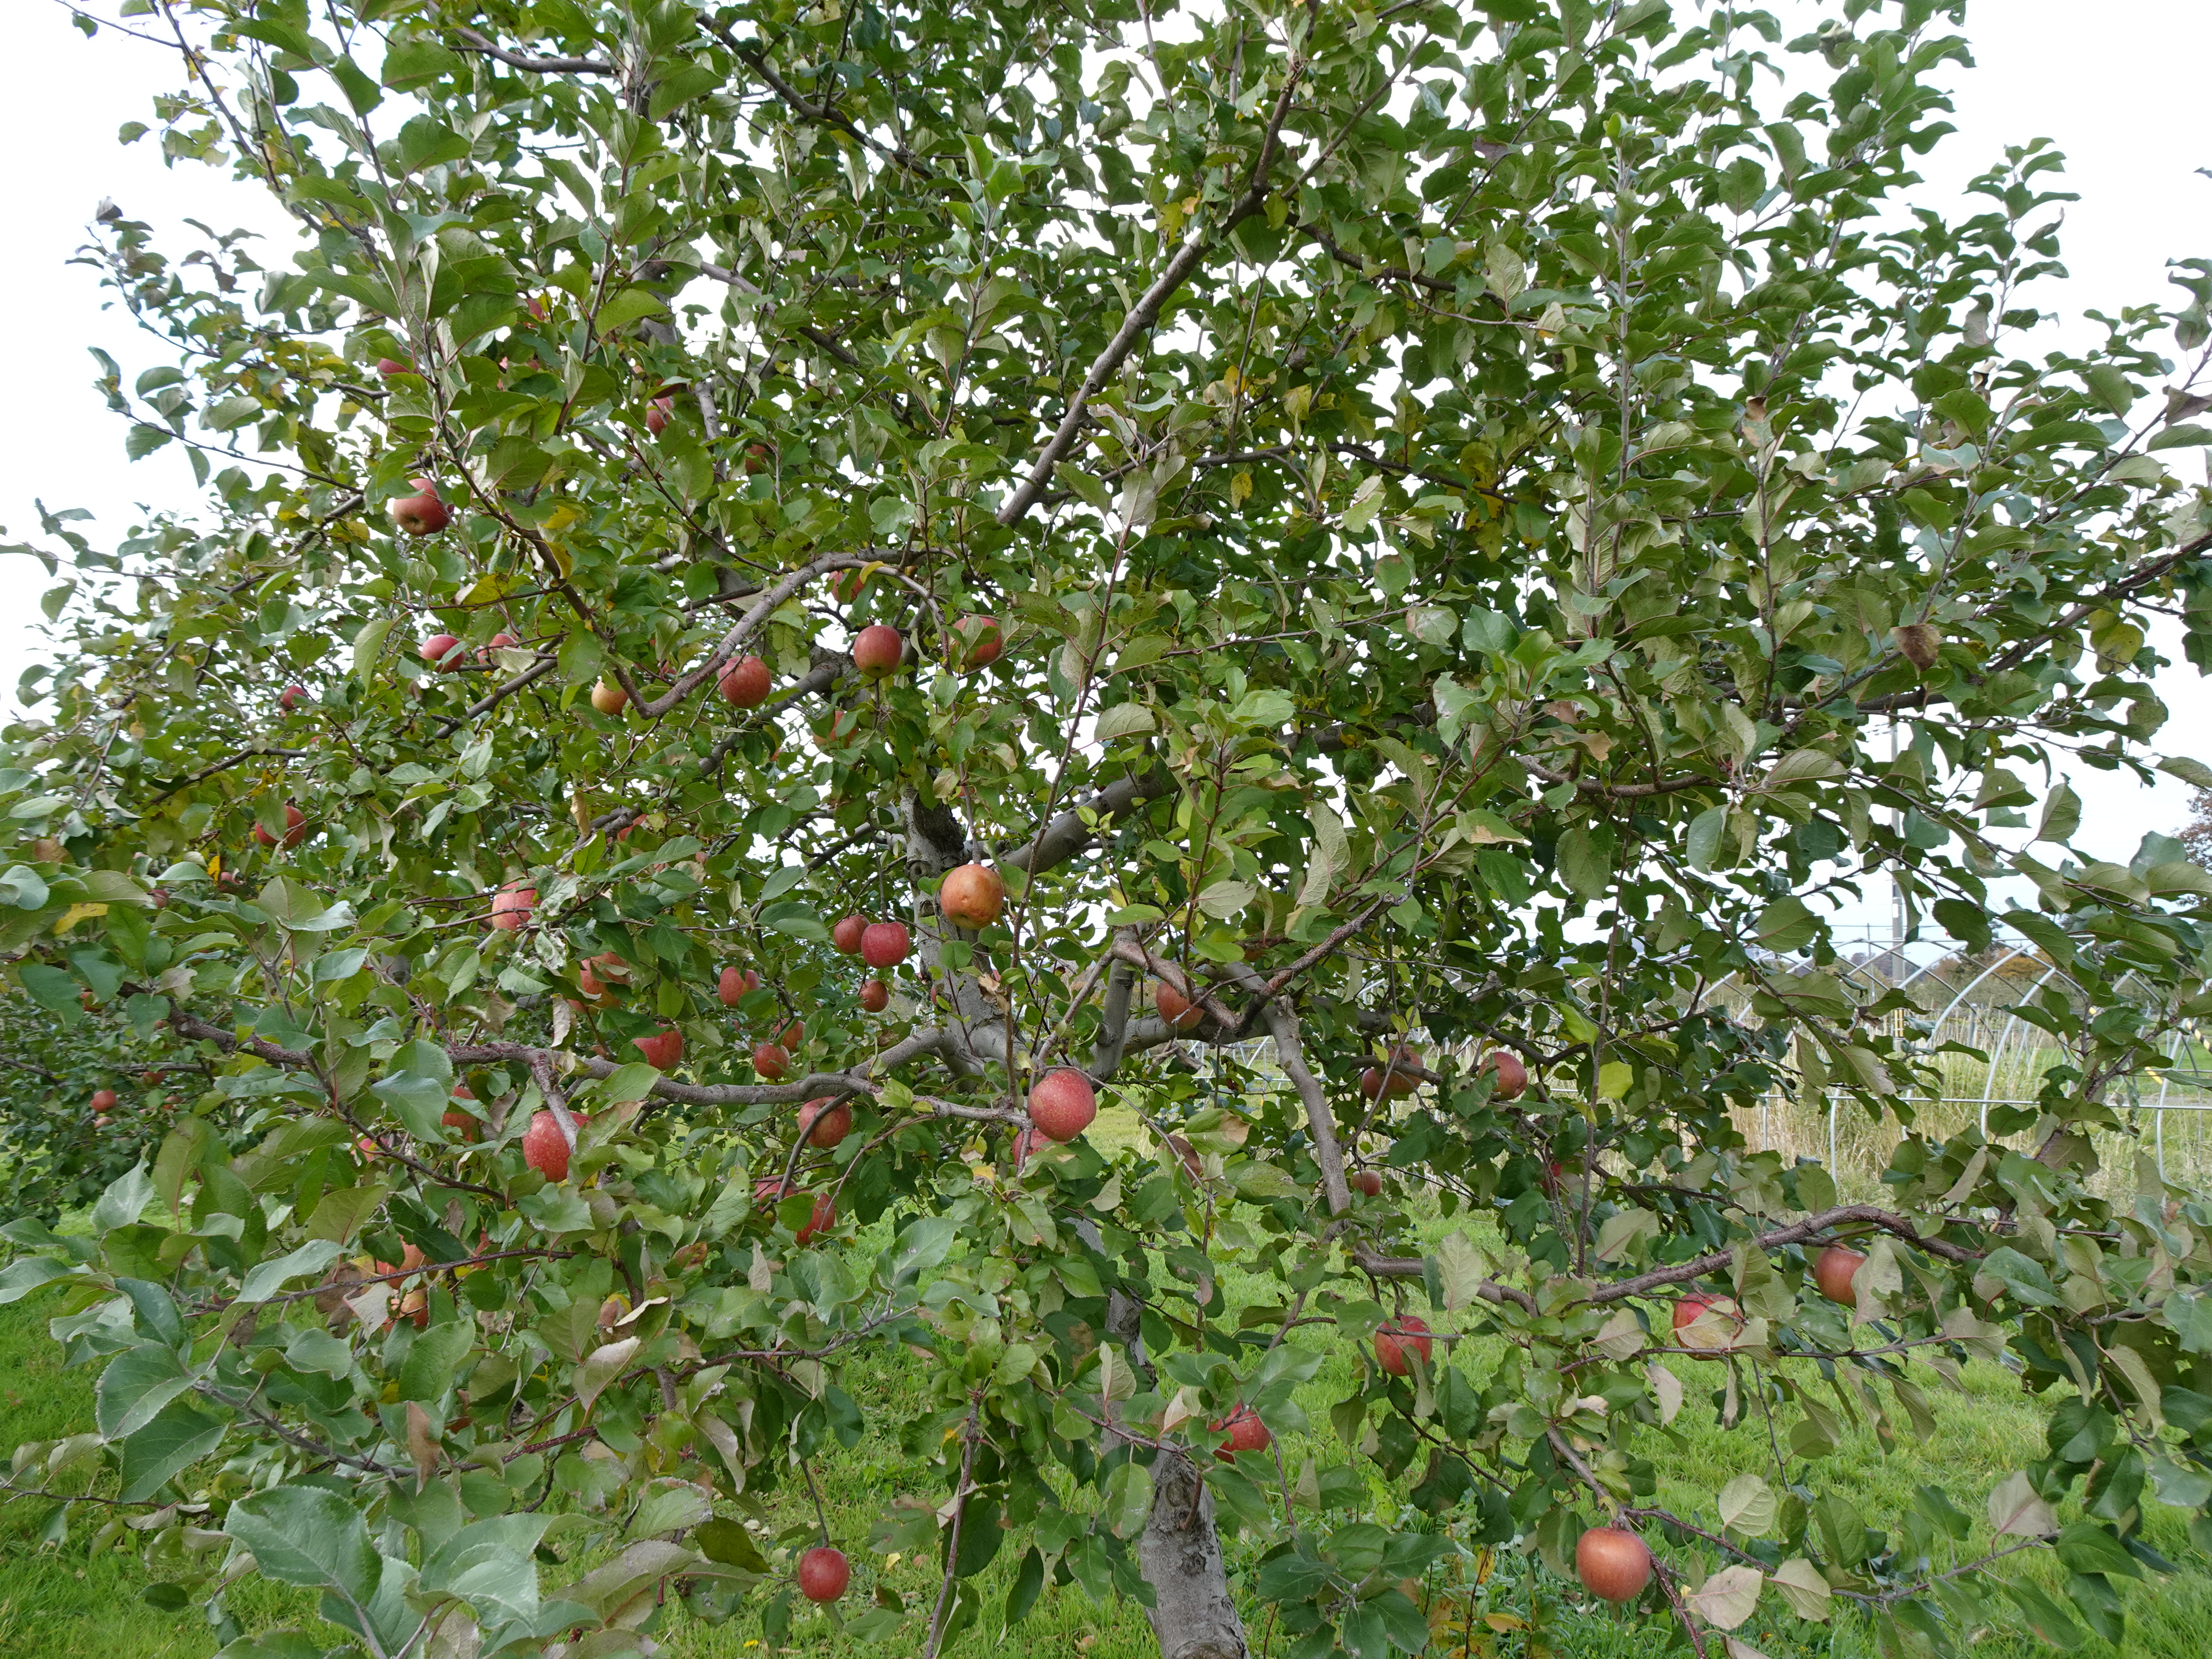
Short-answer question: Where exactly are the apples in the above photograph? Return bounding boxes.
[1349,1169,1383,1199]
[743,435,785,481]
[719,655,771,710]
[1190,774,1227,812]
[1204,1393,1274,1466]
[76,988,105,1013]
[798,1546,849,1602]
[280,702,302,721]
[219,993,248,1022]
[853,978,890,1012]
[253,804,307,850]
[833,914,874,956]
[430,1009,460,1034]
[781,1191,836,1246]
[214,1272,258,1315]
[1014,1127,1067,1175]
[912,965,939,986]
[148,887,171,909]
[632,359,682,402]
[943,616,1004,674]
[1797,1233,1844,1278]
[92,1115,115,1140]
[761,748,790,772]
[635,637,673,673]
[1362,1062,1400,1105]
[477,630,519,673]
[977,970,1016,1003]
[391,477,454,537]
[660,665,686,692]
[503,297,550,339]
[867,1033,903,1061]
[769,1019,808,1056]
[346,1136,394,1180]
[437,1391,481,1433]
[951,782,982,808]
[796,1095,853,1150]
[423,1086,478,1144]
[677,1242,726,1295]
[464,1229,527,1277]
[861,920,910,969]
[1076,1633,1107,1653]
[747,1172,800,1225]
[422,632,465,673]
[212,870,243,895]
[1374,1314,1434,1375]
[524,1109,603,1186]
[587,1042,619,1072]
[852,624,902,679]
[281,684,306,711]
[163,1093,185,1114]
[1814,1242,1874,1307]
[931,976,961,1007]
[614,811,662,851]
[1234,931,1278,964]
[755,1042,791,1080]
[911,1552,938,1577]
[311,735,334,756]
[694,826,731,869]
[1374,1046,1425,1096]
[1026,1065,1098,1143]
[567,951,632,1017]
[153,1018,170,1038]
[719,965,763,1011]
[940,862,1006,929]
[375,346,420,391]
[1067,389,1100,418]
[678,1464,714,1507]
[1538,1154,1586,1202]
[495,353,542,399]
[1672,1293,1746,1363]
[377,1229,441,1291]
[626,1013,684,1074]
[1576,1527,1652,1604]
[827,788,853,815]
[804,375,841,416]
[645,393,692,447]
[811,708,859,757]
[489,878,563,953]
[596,1289,668,1350]
[90,1088,118,1115]
[142,1067,169,1088]
[592,673,632,714]
[1477,1050,1529,1103]
[1156,974,1208,1031]
[830,563,878,604]
[377,1285,440,1336]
